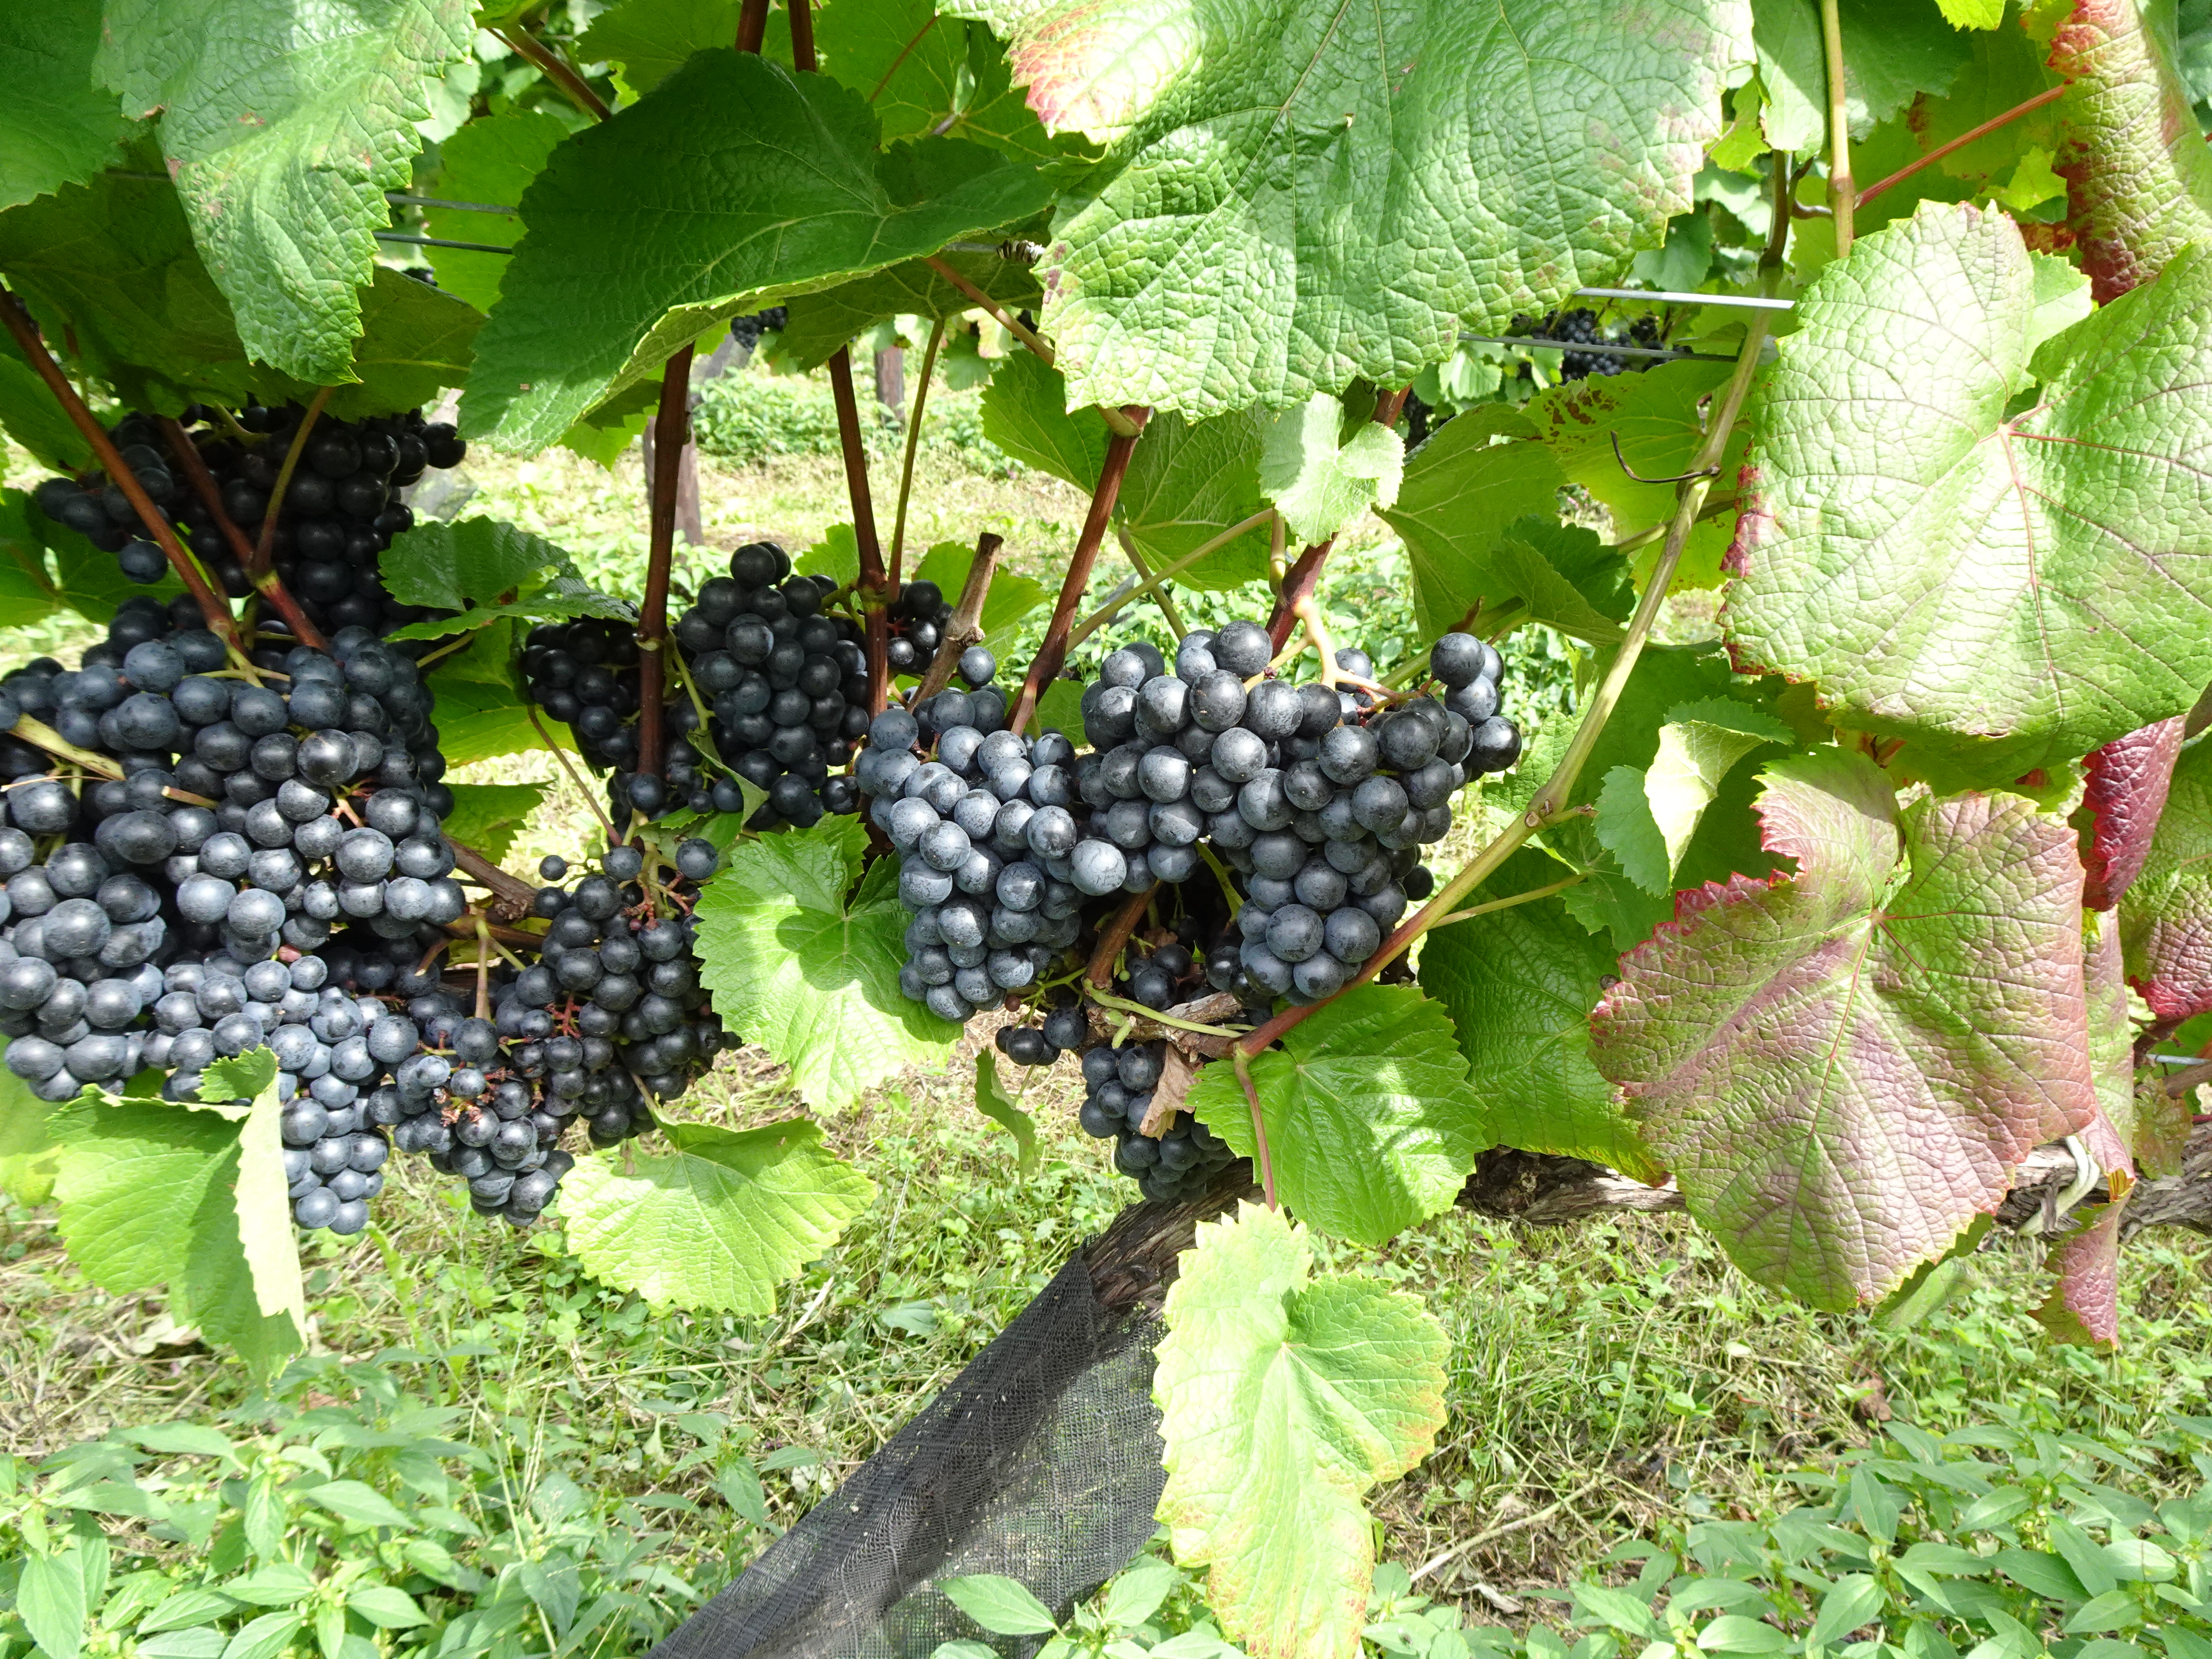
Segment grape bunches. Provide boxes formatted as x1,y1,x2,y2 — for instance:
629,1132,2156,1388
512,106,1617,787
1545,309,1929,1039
730,305,789,353
79,595,468,960
523,602,694,847
1080,915,1259,1205
886,580,954,672
1230,634,1522,999
169,406,469,662
1082,621,1305,893
994,969,1088,1067
369,961,580,1230
502,839,743,1149
0,656,165,1101
35,402,199,583
854,647,1126,1020
675,540,864,834
145,954,394,1234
